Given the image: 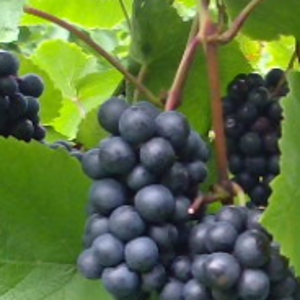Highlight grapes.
<instances>
[{"mask_svg":"<svg viewBox=\"0 0 300 300\" xmlns=\"http://www.w3.org/2000/svg\"><path fill=\"white\" fill-rule=\"evenodd\" d=\"M108 129L81 169L89 191L79 273L108 292L156 290L170 300H295L298 281L281 245L262 227L265 211L238 205L187 215L207 177L210 147L180 109L113 97Z\"/></svg>","mask_w":300,"mask_h":300,"instance_id":"1","label":"grapes"}]
</instances>
